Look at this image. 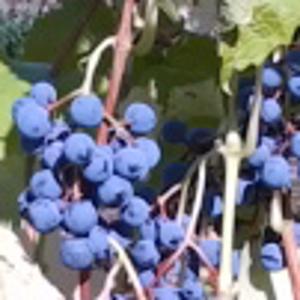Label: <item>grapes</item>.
Segmentation results:
<instances>
[{"instance_id":"01657485","label":"grapes","mask_w":300,"mask_h":300,"mask_svg":"<svg viewBox=\"0 0 300 300\" xmlns=\"http://www.w3.org/2000/svg\"><path fill=\"white\" fill-rule=\"evenodd\" d=\"M58 101L51 81H37L27 98L9 105V116L24 153H40L43 169L14 198V212L36 234L59 229L71 238L60 243V262L88 272L110 257L108 242L135 266L136 282L156 300H206L199 255L190 246L196 223L151 213L156 202L146 182L163 160V147L151 134L159 113L150 103L132 102L106 144L68 124H53L48 108Z\"/></svg>"},{"instance_id":"b958b902","label":"grapes","mask_w":300,"mask_h":300,"mask_svg":"<svg viewBox=\"0 0 300 300\" xmlns=\"http://www.w3.org/2000/svg\"><path fill=\"white\" fill-rule=\"evenodd\" d=\"M288 148L291 153H283L273 133L257 137L255 152L248 158L250 176L243 175L239 180V206H251L255 195L282 194L300 186V131L289 134Z\"/></svg>"},{"instance_id":"0513c4c2","label":"grapes","mask_w":300,"mask_h":300,"mask_svg":"<svg viewBox=\"0 0 300 300\" xmlns=\"http://www.w3.org/2000/svg\"><path fill=\"white\" fill-rule=\"evenodd\" d=\"M159 134L167 144L183 143L194 154H201L213 147L218 140V133L210 127H197L188 130L180 119H169L159 127Z\"/></svg>"},{"instance_id":"84f90ec7","label":"grapes","mask_w":300,"mask_h":300,"mask_svg":"<svg viewBox=\"0 0 300 300\" xmlns=\"http://www.w3.org/2000/svg\"><path fill=\"white\" fill-rule=\"evenodd\" d=\"M262 90L260 98V116L268 126H278L283 121V107L275 99L276 89L284 84V75L280 69L267 64L262 73Z\"/></svg>"},{"instance_id":"f8a65327","label":"grapes","mask_w":300,"mask_h":300,"mask_svg":"<svg viewBox=\"0 0 300 300\" xmlns=\"http://www.w3.org/2000/svg\"><path fill=\"white\" fill-rule=\"evenodd\" d=\"M69 121L76 128L94 129L101 125L103 103L92 92L75 94L69 101Z\"/></svg>"},{"instance_id":"5460f4e3","label":"grapes","mask_w":300,"mask_h":300,"mask_svg":"<svg viewBox=\"0 0 300 300\" xmlns=\"http://www.w3.org/2000/svg\"><path fill=\"white\" fill-rule=\"evenodd\" d=\"M262 244L260 246V262L270 273H279L287 265V257L283 248V233L266 225L262 229Z\"/></svg>"},{"instance_id":"83cd7487","label":"grapes","mask_w":300,"mask_h":300,"mask_svg":"<svg viewBox=\"0 0 300 300\" xmlns=\"http://www.w3.org/2000/svg\"><path fill=\"white\" fill-rule=\"evenodd\" d=\"M286 60L294 73L288 79L287 90L293 99L300 100V51H288Z\"/></svg>"},{"instance_id":"e5b3c951","label":"grapes","mask_w":300,"mask_h":300,"mask_svg":"<svg viewBox=\"0 0 300 300\" xmlns=\"http://www.w3.org/2000/svg\"><path fill=\"white\" fill-rule=\"evenodd\" d=\"M189 171V165L185 161H174L167 165L163 171L161 184L165 188H170L174 184L184 181Z\"/></svg>"},{"instance_id":"2adb6a1f","label":"grapes","mask_w":300,"mask_h":300,"mask_svg":"<svg viewBox=\"0 0 300 300\" xmlns=\"http://www.w3.org/2000/svg\"><path fill=\"white\" fill-rule=\"evenodd\" d=\"M221 241L219 239H203L199 243L200 251L208 257L210 264L218 268Z\"/></svg>"},{"instance_id":"ef6de9ee","label":"grapes","mask_w":300,"mask_h":300,"mask_svg":"<svg viewBox=\"0 0 300 300\" xmlns=\"http://www.w3.org/2000/svg\"><path fill=\"white\" fill-rule=\"evenodd\" d=\"M206 214L210 218H219L223 214V196L219 192H210L204 201Z\"/></svg>"}]
</instances>
